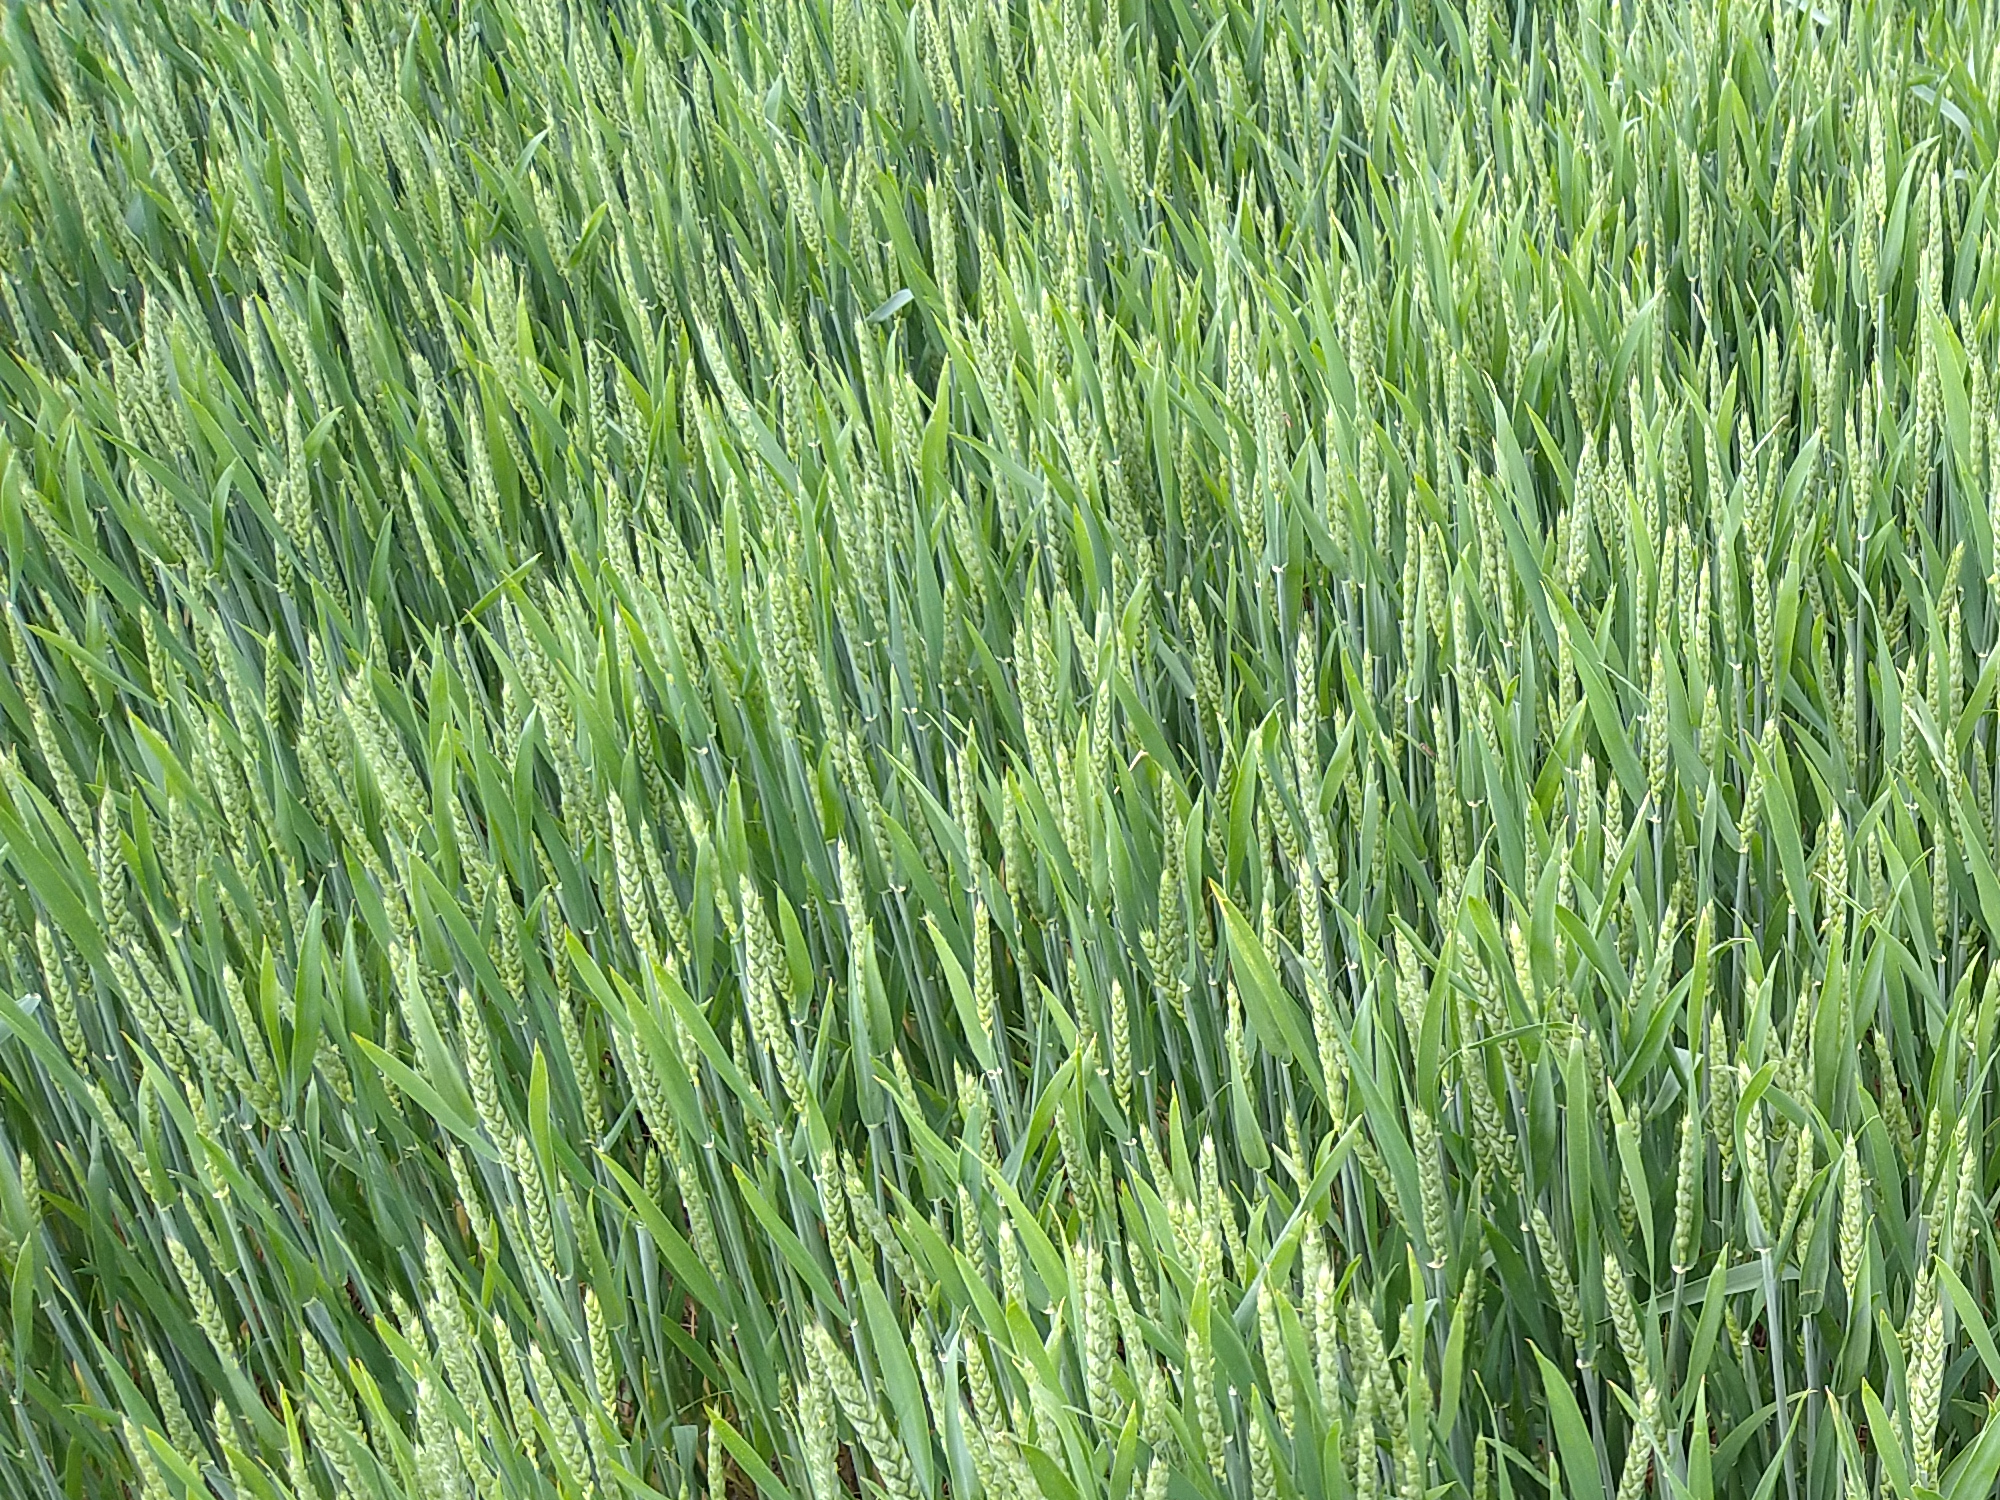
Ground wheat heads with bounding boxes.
[1334,1119,1409,1237]
[489,248,531,346]
[956,1414,1042,1500]
[1451,932,1529,1083]
[1252,373,1267,445]
[424,272,466,364]
[1065,166,1080,239]
[1263,138,1299,223]
[1200,1138,1222,1283]
[1913,144,1941,243]
[1488,0,1506,40]
[54,0,115,60]
[1918,1116,1969,1239]
[0,882,42,1017]
[1183,1195,1200,1256]
[1068,232,1083,322]
[889,1048,920,1126]
[1553,775,1568,831]
[424,1229,471,1366]
[1817,633,1841,728]
[566,46,602,126]
[109,952,185,1076]
[1675,136,1688,188]
[766,926,805,1013]
[1242,174,1254,219]
[1089,137,1113,231]
[1845,1467,1882,1500]
[1092,680,1113,788]
[1948,1156,1973,1266]
[626,82,641,166]
[203,155,258,281]
[1769,114,1797,204]
[1779,1127,1812,1253]
[1931,821,1954,940]
[1874,582,1888,628]
[1393,972,1413,1065]
[756,973,807,1110]
[1743,722,1781,845]
[306,630,351,759]
[1653,881,1679,993]
[4,66,19,117]
[1432,763,1448,868]
[796,1380,848,1500]
[631,513,660,603]
[1137,1122,1181,1259]
[1423,528,1451,641]
[278,994,353,1105]
[1145,1459,1170,1500]
[1436,421,1446,511]
[28,707,93,851]
[42,1061,79,1126]
[1720,216,1735,305]
[1108,1272,1153,1385]
[186,699,208,754]
[765,155,785,223]
[863,192,884,296]
[1201,100,1228,194]
[1539,686,1557,740]
[1913,1307,1945,1482]
[1097,1146,1117,1218]
[1834,581,1854,628]
[843,1146,873,1260]
[0,97,77,277]
[1404,41,1421,150]
[858,427,905,544]
[1569,310,1590,434]
[942,583,956,684]
[1188,600,1216,709]
[1467,307,1492,358]
[1325,434,1351,556]
[566,736,607,831]
[1868,103,1887,210]
[350,689,432,800]
[225,190,285,294]
[1846,407,1863,518]
[1634,125,1653,187]
[636,823,693,951]
[413,939,445,1030]
[267,630,276,721]
[544,192,569,269]
[1741,148,1765,202]
[725,11,736,81]
[1399,1314,1432,1415]
[1521,802,1536,905]
[1986,410,2000,483]
[1584,347,1604,406]
[375,1068,400,1115]
[1011,273,1047,369]
[1192,453,1217,528]
[1946,118,1972,228]
[460,0,474,106]
[952,488,1006,602]
[1970,387,1984,481]
[309,524,352,615]
[515,1134,556,1268]
[891,376,925,471]
[1509,921,1527,999]
[353,830,396,900]
[909,1324,947,1453]
[407,648,430,705]
[802,651,846,781]
[1473,474,1499,583]
[1675,436,1692,500]
[296,733,364,869]
[1249,1420,1281,1500]
[136,484,208,573]
[1815,55,1827,97]
[1254,565,1282,632]
[580,27,622,124]
[1090,55,1110,119]
[1228,322,1240,431]
[1699,554,1708,680]
[619,247,640,312]
[1653,650,1668,796]
[845,734,909,874]
[1310,76,1322,179]
[614,1026,671,1168]
[565,452,583,523]
[1007,1461,1091,1500]
[160,0,196,50]
[137,605,167,710]
[489,113,515,168]
[818,1147,844,1271]
[1732,410,1757,534]
[1159,771,1186,888]
[216,880,254,962]
[1028,600,1065,751]
[340,94,374,170]
[1946,723,1964,793]
[526,360,554,409]
[1607,421,1627,566]
[1296,859,1323,1004]
[1404,1446,1429,1500]
[1768,1128,1801,1233]
[256,451,275,508]
[537,704,581,798]
[830,0,853,83]
[1040,286,1053,355]
[1464,0,1476,47]
[556,1002,600,1138]
[444,1143,487,1252]
[1411,1107,1448,1254]
[1010,622,1055,752]
[706,1426,728,1500]
[410,1019,434,1093]
[1003,196,1016,273]
[894,770,939,870]
[243,299,285,457]
[1750,553,1778,687]
[1636,565,1651,687]
[275,482,297,597]
[641,31,667,109]
[969,586,987,632]
[977,229,995,338]
[298,1328,358,1441]
[1788,267,1813,376]
[1960,296,1988,391]
[326,0,357,93]
[115,768,172,877]
[1435,711,1461,827]
[1180,575,1196,637]
[734,874,768,1039]
[1655,216,1666,281]
[1073,1241,1085,1339]
[912,0,924,74]
[24,5,50,78]
[890,443,917,532]
[1333,711,1355,822]
[335,288,372,406]
[658,2,682,54]
[1859,218,1868,267]
[1414,203,1433,297]
[301,695,324,820]
[0,144,52,259]
[66,96,152,275]
[635,303,653,378]
[1782,341,1799,435]
[208,622,259,751]
[1456,597,1475,709]
[505,34,539,105]
[1230,54,1257,124]
[1122,376,1147,451]
[1804,566,1824,615]
[375,94,408,171]
[545,0,565,57]
[675,229,697,314]
[1463,371,1481,451]
[681,165,702,243]
[1060,581,1096,686]
[1568,434,1587,581]
[493,1321,531,1461]
[1197,896,1212,965]
[639,0,658,52]
[1580,753,1592,837]
[301,312,335,428]
[445,790,492,927]
[1212,41,1226,104]
[640,1149,659,1209]
[1496,505,1517,645]
[1351,303,1373,383]
[1703,214,1714,322]
[580,1290,614,1419]
[1358,1425,1375,1500]
[1278,748,1296,811]
[0,273,49,378]
[1947,597,1965,723]
[1263,52,1288,140]
[407,0,443,33]
[620,151,653,282]
[112,395,144,477]
[1036,5,1068,89]
[1801,222,1814,287]
[1861,379,1875,502]
[966,315,1013,435]
[809,315,845,421]
[357,68,386,176]
[1720,541,1739,659]
[854,144,867,204]
[510,1213,549,1312]
[1607,776,1626,887]
[1470,83,1493,161]
[545,892,570,1003]
[1799,168,1812,222]
[1102,459,1145,546]
[526,167,560,265]
[304,178,377,332]
[1795,449,1824,525]
[235,862,289,971]
[1026,428,1039,480]
[1613,1388,1660,1500]
[1557,621,1578,715]
[1802,305,1827,425]
[1913,146,1931,185]
[1219,1191,1245,1289]
[300,1401,383,1500]
[1108,2,1121,77]
[729,470,748,548]
[1881,2,1898,99]
[1723,125,1742,196]
[676,1166,728,1291]
[1393,925,1426,1030]
[1139,1364,1164,1452]
[935,0,962,96]
[500,418,542,494]
[1654,530,1678,639]
[1137,540,1156,670]
[1902,493,1914,550]
[1866,189,1877,328]
[1937,541,1965,627]
[1016,846,1038,925]
[1052,1098,1092,1241]
[1124,1234,1164,1322]
[167,793,186,911]
[971,901,988,1036]
[697,309,763,433]
[1475,1436,1486,1500]
[851,314,874,392]
[1284,1104,1304,1208]
[1303,147,1316,199]
[648,493,720,634]
[1928,170,1945,311]
[565,578,598,669]
[1154,122,1172,198]
[1535,0,1550,43]
[1436,133,1458,200]
[1502,172,1516,232]
[778,147,826,254]
[141,294,175,408]
[1557,29,1580,121]
[1694,333,1711,391]
[675,803,734,931]
[472,469,493,544]
[1732,1073,1770,1228]
[478,255,511,345]
[35,588,92,698]
[28,236,100,365]
[833,836,860,941]
[1993,485,2000,585]
[1667,419,1678,525]
[1461,1052,1529,1186]
[1353,35,1380,128]
[1468,0,1488,77]
[1064,0,1092,64]
[112,363,167,461]
[942,756,959,823]
[1608,0,1623,64]
[1036,52,1063,153]
[1236,375,1253,434]
[1326,34,1339,101]
[1526,307,1546,346]
[673,1482,688,1500]
[1836,120,1850,166]
[1438,321,1455,408]
[1512,120,1526,177]
[1337,268,1359,354]
[386,887,408,952]
[517,0,543,72]
[1129,80,1149,199]
[457,987,520,1168]
[1098,302,1105,359]
[1502,278,1532,360]
[156,71,208,205]
[1428,74,1452,141]
[1922,304,1948,428]
[1655,376,1671,424]
[1110,549,1131,627]
[946,0,975,64]
[680,964,702,1088]
[1582,1026,1611,1146]
[783,562,817,656]
[1920,1107,1943,1201]
[738,163,764,266]
[1043,166,1068,248]
[1170,428,1180,476]
[1373,231,1389,305]
[1308,226,1332,291]
[471,309,528,411]
[863,1196,920,1293]
[0,1237,20,1287]
[1915,367,1935,508]
[1779,182,1791,274]
[858,18,877,66]
[559,787,598,874]
[1140,938,1186,1018]
[412,356,446,486]
[1901,1269,1937,1350]
[632,1030,682,1149]
[985,438,1017,550]
[275,0,300,42]
[104,330,183,461]
[1063,68,1076,169]
[1534,189,1553,238]
[1581,439,1612,551]
[833,583,871,688]
[552,500,580,561]
[1053,377,1085,496]
[1551,505,1576,581]
[345,712,411,821]
[276,58,337,200]
[1479,692,1496,755]
[608,799,652,951]
[1208,733,1229,849]
[1108,978,1128,1115]
[686,59,723,175]
[1765,320,1782,428]
[958,1184,991,1294]
[631,696,660,807]
[1992,815,2000,892]
[349,0,400,101]
[854,531,886,627]
[1400,487,1419,664]
[1871,1032,1914,1175]
[1245,472,1263,548]
[1315,996,1342,1120]
[1788,989,1807,1085]
[1841,1128,1864,1301]
[1711,1010,1735,1168]
[379,223,429,324]
[93,1085,153,1197]
[1451,1267,1473,1339]
[16,480,111,620]
[1184,1323,1228,1476]
[1015,945,1042,1035]
[18,1149,39,1228]
[746,43,769,99]
[733,247,769,310]
[504,782,560,891]
[964,1332,1024,1464]
[0,226,21,276]
[862,471,879,570]
[903,602,921,702]
[109,917,170,985]
[219,1049,285,1126]
[1251,1281,1293,1431]
[1475,247,1496,342]
[1588,140,1606,191]
[1554,939,1577,1020]
[38,924,88,1056]
[653,63,674,167]
[2,601,57,736]
[1064,958,1092,1049]
[1320,1263,1336,1416]
[946,511,972,575]
[681,356,696,468]
[988,0,1019,103]
[99,787,125,924]
[146,1346,213,1476]
[112,1412,185,1500]
[1990,54,2000,110]
[958,745,985,896]
[849,186,867,278]
[1986,905,2000,1048]
[1102,338,1130,456]
[1574,109,1585,147]
[665,598,704,708]
[182,813,209,868]
[1678,522,1693,641]
[886,240,905,330]
[1696,898,1715,990]
[1275,31,1310,152]
[187,571,231,715]
[624,584,671,671]
[186,747,227,851]
[444,468,472,534]
[1620,898,1637,968]
[1271,372,1292,487]
[689,597,736,696]
[750,466,773,524]
[1142,44,1163,107]
[1296,755,1338,878]
[498,597,555,712]
[1040,469,1064,591]
[1328,150,1339,219]
[110,30,158,121]
[54,112,100,253]
[1623,1101,1642,1231]
[1850,96,1869,148]
[1348,0,1368,58]
[873,9,900,128]
[1516,96,1558,201]
[1375,793,1386,884]
[1158,866,1185,969]
[385,1010,401,1118]
[1025,1359,1067,1470]
[825,468,858,571]
[653,227,682,330]
[1390,144,1407,222]
[1391,667,1403,744]
[1926,651,1942,722]
[835,155,858,212]
[940,206,958,325]
[304,8,323,79]
[1376,472,1390,558]
[1228,424,1252,534]
[785,0,806,96]
[604,475,622,535]
[375,466,423,573]
[285,392,317,557]
[411,1444,471,1500]
[700,227,719,310]
[1644,479,1658,566]
[729,1017,756,1150]
[133,22,169,84]
[408,1317,435,1404]
[1704,424,1723,539]
[127,946,228,1095]
[531,1350,597,1497]
[1359,646,1377,760]
[770,572,794,704]
[137,548,160,606]
[1523,1204,1589,1342]
[216,961,280,1092]
[1086,1250,1106,1436]
[623,7,641,41]
[920,26,952,105]
[765,0,783,71]
[1992,129,2000,219]
[981,1113,999,1172]
[430,170,457,265]
[1690,7,1708,121]
[596,142,622,231]
[1024,721,1064,822]
[209,720,254,835]
[1870,829,1888,916]
[1051,740,1087,888]
[1251,800,1277,968]
[452,630,482,729]
[1299,0,1314,43]
[1805,970,1848,1090]
[520,611,578,721]
[661,58,702,177]
[500,680,521,760]
[1598,1253,1654,1402]
[385,948,410,1003]
[1451,796,1468,883]
[1557,833,1572,915]
[547,584,571,653]
[260,259,307,381]
[1192,661,1223,759]
[1112,106,1124,160]
[198,75,236,162]
[1255,740,1292,866]
[798,144,816,200]
[1744,981,1779,1079]
[490,877,522,987]
[1359,431,1377,506]
[720,264,770,364]
[615,384,670,479]
[748,583,785,718]
[1218,215,1230,296]
[1472,1121,1492,1209]
[1355,1306,1404,1457]
[400,468,451,583]
[412,1393,470,1500]
[1769,0,1782,71]
[470,413,500,522]
[999,1221,1024,1322]
[591,339,608,456]
[1301,1212,1322,1328]
[600,527,631,588]
[1824,803,1843,933]
[583,1408,624,1500]
[45,135,68,217]
[1671,819,1696,945]
[1451,352,1462,445]
[1631,938,1642,1010]
[356,402,390,479]
[1837,651,1858,764]
[1677,1109,1699,1249]
[403,171,434,277]
[1628,377,1645,498]
[817,1335,938,1500]
[797,0,838,100]
[1,420,37,488]
[1898,652,1916,785]
[1687,150,1700,264]
[385,1291,412,1335]
[1653,288,1666,380]
[1179,442,1193,535]
[1124,1464,1142,1500]
[221,167,292,281]
[339,461,373,529]
[1005,779,1025,907]
[1703,687,1721,767]
[1985,0,1999,55]
[1635,174,1648,253]
[57,5,90,106]
[429,1307,471,1425]
[169,1244,239,1362]
[1828,338,1842,419]
[760,454,805,546]
[213,1398,254,1490]
[1817,485,1839,567]
[1330,0,1349,62]
[780,319,806,461]
[798,1315,840,1461]
[358,595,389,671]
[928,175,942,295]
[855,921,871,1040]
[183,1075,232,1197]
[109,53,130,137]
[1885,582,1911,640]
[142,121,200,243]
[1753,451,1780,553]
[1020,0,1048,58]
[1265,208,1278,264]
[862,107,886,177]
[1847,1,1862,71]
[1639,0,1660,54]
[1292,631,1314,776]
[1429,325,1433,420]
[1712,347,1722,416]
[1016,144,1040,219]
[1969,733,1994,812]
